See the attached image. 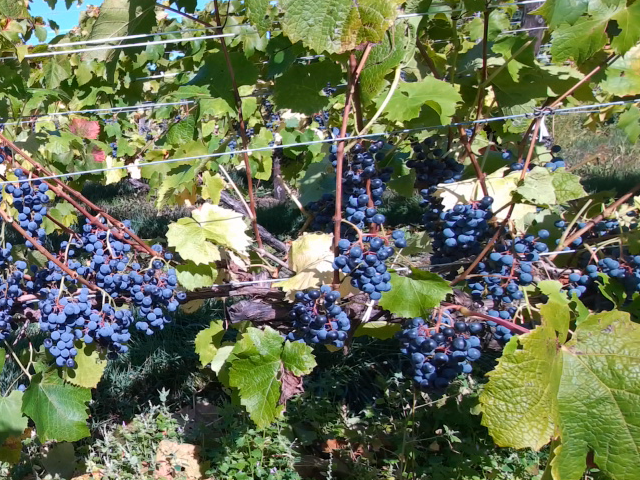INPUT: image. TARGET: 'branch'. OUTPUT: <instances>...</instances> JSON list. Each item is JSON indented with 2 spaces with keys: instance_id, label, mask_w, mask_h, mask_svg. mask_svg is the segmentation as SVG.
<instances>
[{
  "instance_id": "725ea6d5",
  "label": "branch",
  "mask_w": 640,
  "mask_h": 480,
  "mask_svg": "<svg viewBox=\"0 0 640 480\" xmlns=\"http://www.w3.org/2000/svg\"><path fill=\"white\" fill-rule=\"evenodd\" d=\"M370 188H371L370 179H367V181H366V194L368 195V198H369L368 207L374 208V200L372 198V195H371V192H370Z\"/></svg>"
},
{
  "instance_id": "a944a4c4",
  "label": "branch",
  "mask_w": 640,
  "mask_h": 480,
  "mask_svg": "<svg viewBox=\"0 0 640 480\" xmlns=\"http://www.w3.org/2000/svg\"><path fill=\"white\" fill-rule=\"evenodd\" d=\"M541 124V120L537 119L535 121L534 127H533V132H532V136H531V140H530V147H529V151H528V155L527 158L525 160V165L524 168L521 170L520 173V178L524 179L526 173L528 172L529 168H530V163L533 157V153L535 150V142H536V138H537V134H538V130Z\"/></svg>"
},
{
  "instance_id": "ca6c30ca",
  "label": "branch",
  "mask_w": 640,
  "mask_h": 480,
  "mask_svg": "<svg viewBox=\"0 0 640 480\" xmlns=\"http://www.w3.org/2000/svg\"><path fill=\"white\" fill-rule=\"evenodd\" d=\"M640 190V184H638L635 188L631 189L630 191L626 192L624 195H622L621 197H619L617 200L613 201L611 203V205L606 209L603 210L602 212H600L599 214H597L592 221H590L584 228L580 229L579 231H577L576 233H574L573 235H571L569 238H567L566 240L562 241L558 246H557V250H562V248H564L566 245L570 244L571 242H573L576 238H578L579 236L583 235L584 233H586L589 229H591L602 217L610 214L615 208L616 206H618L619 204H621L623 201H625L628 197H631L632 195H634L635 193H637Z\"/></svg>"
},
{
  "instance_id": "45aa463d",
  "label": "branch",
  "mask_w": 640,
  "mask_h": 480,
  "mask_svg": "<svg viewBox=\"0 0 640 480\" xmlns=\"http://www.w3.org/2000/svg\"><path fill=\"white\" fill-rule=\"evenodd\" d=\"M0 216L3 217L8 223L9 225L16 230L17 232H19L20 234H22L25 238H27L33 245L35 248H37L40 252H42L45 257L52 263L58 265L59 267H61L65 272H67L68 274H70L71 276H73L74 278L78 279L79 281H81L83 284H85L87 287L90 288L91 291H95L97 289V286L94 285L92 282L88 281L84 276L80 275L79 273L75 272L73 269L69 268L68 266H66V264L62 261H60L57 258H54L46 248H44L41 244H39L38 242L35 241V239H33L32 237H30L28 235V233L26 232V230H24L22 227L18 226L12 219L11 217L4 212L3 208H0Z\"/></svg>"
},
{
  "instance_id": "1d269e1b",
  "label": "branch",
  "mask_w": 640,
  "mask_h": 480,
  "mask_svg": "<svg viewBox=\"0 0 640 480\" xmlns=\"http://www.w3.org/2000/svg\"><path fill=\"white\" fill-rule=\"evenodd\" d=\"M489 11L484 12V23L482 31V64H481V79L479 85V106L475 118H481L484 108V88L486 82V66H487V33L489 25Z\"/></svg>"
},
{
  "instance_id": "afce2bb1",
  "label": "branch",
  "mask_w": 640,
  "mask_h": 480,
  "mask_svg": "<svg viewBox=\"0 0 640 480\" xmlns=\"http://www.w3.org/2000/svg\"><path fill=\"white\" fill-rule=\"evenodd\" d=\"M416 48L418 49V51L422 54V57L424 59V61L426 62V64L428 65V67L430 68L432 74L434 75V77L436 79L440 78V74L437 71L436 67L434 66V64L432 63L431 59L429 58V56L427 55V51L422 47V42L421 41H417L416 42Z\"/></svg>"
},
{
  "instance_id": "2b1400db",
  "label": "branch",
  "mask_w": 640,
  "mask_h": 480,
  "mask_svg": "<svg viewBox=\"0 0 640 480\" xmlns=\"http://www.w3.org/2000/svg\"><path fill=\"white\" fill-rule=\"evenodd\" d=\"M615 57L614 53H610L607 57H605L603 60L600 61V63L592 70L590 71L586 77H584L583 79L579 80L578 82H576L572 87L564 90L561 95L559 96L558 99L554 100L551 104H550V108L554 109L555 106H557L558 104H560L564 98L570 94L573 93L574 91H576L579 87H581L583 84L587 83L590 81V79L596 75L604 66L605 64H607L609 61H611L613 58Z\"/></svg>"
},
{
  "instance_id": "982ccf7c",
  "label": "branch",
  "mask_w": 640,
  "mask_h": 480,
  "mask_svg": "<svg viewBox=\"0 0 640 480\" xmlns=\"http://www.w3.org/2000/svg\"><path fill=\"white\" fill-rule=\"evenodd\" d=\"M474 130L475 131L473 132L472 137L468 142L466 133H465V131L463 129V126H458V131H459V133L461 135L462 144H463V146L465 148V150L463 151L461 157L459 158V162L463 163L466 160L467 156H468V158L470 159V161H471V163H472V165H473V167L475 169V172H476V174H477V176H478V178H479V180H480V182L482 184L483 193H484L485 196H488L489 195V191H488L487 181L485 180L484 175L482 174V172L480 170V167H479V165H478V163L476 161V158L474 157L473 152L471 150L473 145H474V143L477 140V136L480 134V123H475L474 124Z\"/></svg>"
},
{
  "instance_id": "46de074c",
  "label": "branch",
  "mask_w": 640,
  "mask_h": 480,
  "mask_svg": "<svg viewBox=\"0 0 640 480\" xmlns=\"http://www.w3.org/2000/svg\"><path fill=\"white\" fill-rule=\"evenodd\" d=\"M46 218L52 221L55 225L59 226L60 228L68 232L69 234H71L73 237H76V234L74 231L70 230L69 228L65 227L63 224L59 223L55 218L51 217L49 214H46Z\"/></svg>"
},
{
  "instance_id": "1af6ec82",
  "label": "branch",
  "mask_w": 640,
  "mask_h": 480,
  "mask_svg": "<svg viewBox=\"0 0 640 480\" xmlns=\"http://www.w3.org/2000/svg\"><path fill=\"white\" fill-rule=\"evenodd\" d=\"M243 161H244V166H245V170L247 173V179H248V194H249V203H250V211L252 214V222H253V230H254V234L256 235V247L257 248H261L262 247V237H261V233L259 231L258 228V219H257V212H256V208H255V201H254V192H253V177H252V171L250 168V164H249V159H248V153H243Z\"/></svg>"
},
{
  "instance_id": "8bde2521",
  "label": "branch",
  "mask_w": 640,
  "mask_h": 480,
  "mask_svg": "<svg viewBox=\"0 0 640 480\" xmlns=\"http://www.w3.org/2000/svg\"><path fill=\"white\" fill-rule=\"evenodd\" d=\"M0 139L8 146L11 147L17 154H19L23 159H25L31 166L38 169L41 173L47 174L48 176L53 174V172L49 169L44 168L42 165L38 164L34 160H32L25 152H23L16 144L8 140L3 133H0Z\"/></svg>"
},
{
  "instance_id": "7c5c6f52",
  "label": "branch",
  "mask_w": 640,
  "mask_h": 480,
  "mask_svg": "<svg viewBox=\"0 0 640 480\" xmlns=\"http://www.w3.org/2000/svg\"><path fill=\"white\" fill-rule=\"evenodd\" d=\"M0 155H3V156H4V159L8 160V161H9V163H10V164H12V166H13L15 169H22V170H23V174H24L25 176H27V177H30V176H38L37 174H35V173H34V171H32V170H27V169H25L24 167H22L20 164H18L16 160H14L10 155H8V154H6V153L4 152V149H3V148H0Z\"/></svg>"
},
{
  "instance_id": "30e6481e",
  "label": "branch",
  "mask_w": 640,
  "mask_h": 480,
  "mask_svg": "<svg viewBox=\"0 0 640 480\" xmlns=\"http://www.w3.org/2000/svg\"><path fill=\"white\" fill-rule=\"evenodd\" d=\"M54 183H57L59 185H61L68 193H70L71 195H73L74 197H77L78 199H80L81 201H83L84 203H86L88 206H90L92 209H94L99 215H103L107 220H109L110 222H112L114 225L118 226L119 228H121L122 231H124L128 237H130L133 240L127 239L124 236H122L121 234H119L118 232H116L113 228L108 227L100 222H98L91 213H89L84 207H82L80 204H78L74 199H72L69 195L61 192L60 190H58L50 181H40V183H47L49 185V189L56 194L57 196L61 197L62 199H65L67 202H69L74 208H76L77 210H79L85 217H87L90 222L95 225L96 227H98L99 229L106 231L108 233H110L113 237L117 238L118 240H120L121 242H123L124 244H128L132 247H134L135 249H137L138 252L144 253V254H149L151 257L156 258L157 257V253L154 252L141 238H139L138 236H136L135 234H133L126 226L124 223H122L119 220H116L112 215H110L109 213H107L106 210H102L99 206H97L96 204H94L91 200H89L87 197H85L84 195H82L81 193L75 191L74 189H72L64 180L60 179V178H56L53 179Z\"/></svg>"
},
{
  "instance_id": "170604dd",
  "label": "branch",
  "mask_w": 640,
  "mask_h": 480,
  "mask_svg": "<svg viewBox=\"0 0 640 480\" xmlns=\"http://www.w3.org/2000/svg\"><path fill=\"white\" fill-rule=\"evenodd\" d=\"M343 145H344L343 141H340L337 144V154H336V161H335L336 196L334 201L335 218L333 221V233H334L333 244H334L335 256L339 255V240L341 239L340 224L342 221L341 203L343 199V188H342V181H343L342 163H343V157H344V150L342 149Z\"/></svg>"
},
{
  "instance_id": "ea751061",
  "label": "branch",
  "mask_w": 640,
  "mask_h": 480,
  "mask_svg": "<svg viewBox=\"0 0 640 480\" xmlns=\"http://www.w3.org/2000/svg\"><path fill=\"white\" fill-rule=\"evenodd\" d=\"M514 210H515V204L511 203L510 207H509V210L506 212L505 217L503 218L502 222L500 223V225L497 228L496 234L488 241V243L485 245V247L476 256V258L473 260L472 264L470 265L469 269H467L466 271H464L463 273H461L460 275H458L457 277H455L451 281V283H450L451 287H454L459 281H461L462 279H464L465 277H467V276H469L470 274L473 273V271L475 270L476 266L481 261V259L484 257V255L489 251L491 246L501 236V233H502L504 227L506 226V224L510 220L511 215L514 213Z\"/></svg>"
},
{
  "instance_id": "1ff4a987",
  "label": "branch",
  "mask_w": 640,
  "mask_h": 480,
  "mask_svg": "<svg viewBox=\"0 0 640 480\" xmlns=\"http://www.w3.org/2000/svg\"><path fill=\"white\" fill-rule=\"evenodd\" d=\"M220 43H221V48H222V50L224 52L225 64L228 67L230 80L232 82L233 90H234V93H235V96H236V99H237V103H238V107H239V119H240V129H241V136H242V147L246 148V147H248V144H247V133H246V127H245L244 105H243L241 93H240V90H239V87H238L237 79L235 77L233 65H232V63L230 61L229 50L227 48L225 38H220Z\"/></svg>"
},
{
  "instance_id": "325d2c04",
  "label": "branch",
  "mask_w": 640,
  "mask_h": 480,
  "mask_svg": "<svg viewBox=\"0 0 640 480\" xmlns=\"http://www.w3.org/2000/svg\"><path fill=\"white\" fill-rule=\"evenodd\" d=\"M372 49V44L368 43L366 46V50L363 53L361 59L357 62V56L355 54L350 55V81L348 91H347V99L344 108V113L342 116L341 122V133L340 135H346V125L347 118L350 111V106L352 103V94H353V108L355 112V125L356 130L361 132L363 130V122H362V110L360 105V92H359V76L362 70V67L367 60Z\"/></svg>"
}]
</instances>
